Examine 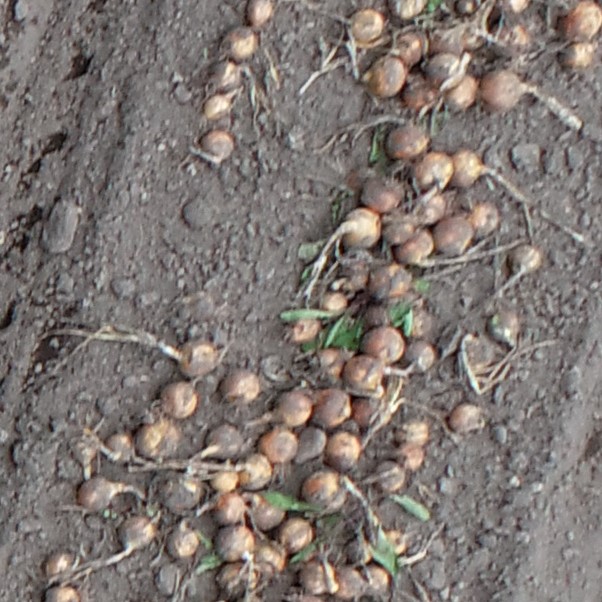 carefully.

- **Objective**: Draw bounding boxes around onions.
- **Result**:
[322,432,358,469]
[301,470,342,509]
[367,261,410,301]
[396,442,424,470]
[252,497,282,528]
[392,232,433,264]
[446,401,482,435]
[317,346,347,376]
[360,324,403,362]
[382,210,418,242]
[560,40,593,70]
[45,581,78,601]
[180,339,217,376]
[392,28,427,66]
[300,562,331,592]
[211,469,239,492]
[214,493,245,524]
[211,66,241,96]
[406,343,434,371]
[321,288,349,313]
[426,50,461,85]
[463,199,499,236]
[402,416,432,447]
[232,453,271,490]
[351,394,377,424]
[216,526,253,560]
[336,247,375,285]
[217,562,249,595]
[401,75,438,110]
[495,23,532,56]
[486,308,520,345]
[43,549,74,577]
[104,430,131,461]
[362,173,403,212]
[498,0,529,11]
[292,427,327,463]
[359,301,398,327]
[310,388,351,428]
[433,216,471,255]
[459,25,485,51]
[444,74,477,108]
[343,355,383,394]
[394,0,426,21]
[414,152,452,189]
[259,539,288,570]
[376,462,404,491]
[120,513,159,549]
[365,56,407,96]
[335,571,363,598]
[209,422,245,460]
[414,193,449,224]
[290,320,321,348]
[75,476,111,514]
[220,367,260,404]
[560,4,598,41]
[512,243,542,272]
[433,27,460,54]
[408,310,435,336]
[389,291,424,312]
[449,147,484,185]
[155,475,200,515]
[166,524,200,559]
[197,126,231,160]
[199,92,235,119]
[348,8,386,46]
[260,429,296,464]
[138,420,180,461]
[386,121,428,159]
[339,209,380,248]
[162,382,198,417]
[224,28,256,60]
[273,390,312,428]
[480,70,520,112]
[246,0,273,27]
[359,564,389,591]
[460,333,495,369]
[275,516,311,551]
[340,418,360,436]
